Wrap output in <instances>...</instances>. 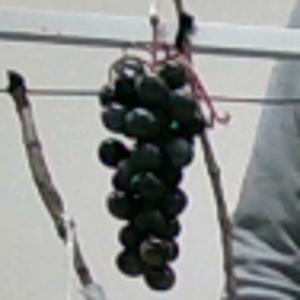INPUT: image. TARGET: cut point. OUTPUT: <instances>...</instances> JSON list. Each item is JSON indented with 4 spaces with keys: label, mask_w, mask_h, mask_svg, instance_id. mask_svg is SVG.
<instances>
[{
    "label": "cut point",
    "mask_w": 300,
    "mask_h": 300,
    "mask_svg": "<svg viewBox=\"0 0 300 300\" xmlns=\"http://www.w3.org/2000/svg\"><path fill=\"white\" fill-rule=\"evenodd\" d=\"M161 5V0L148 1V24L152 28V62L149 65V69L152 72L159 70V31L161 27L159 9Z\"/></svg>",
    "instance_id": "cut-point-1"
}]
</instances>
